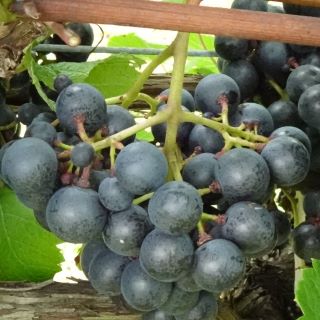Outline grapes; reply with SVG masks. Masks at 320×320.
<instances>
[{
  "label": "grapes",
  "instance_id": "obj_1",
  "mask_svg": "<svg viewBox=\"0 0 320 320\" xmlns=\"http://www.w3.org/2000/svg\"><path fill=\"white\" fill-rule=\"evenodd\" d=\"M218 73L204 77L194 98L181 91V112L228 124L271 139L263 150L220 152L225 140L213 127L178 122L176 142L183 160L200 154L174 181L162 153L167 122L152 125L154 139L135 134L115 149H99L103 170H90L89 187L65 185L53 146H71L75 166L91 163L87 136L101 128L106 138L134 125L129 111L106 105L91 84L64 74L50 108L36 86L32 103L19 107L24 138L0 149V179L31 208L37 222L57 238L83 243L81 269L100 294L118 296L134 309L150 311L141 320H216L218 294L242 283L247 258H260L289 240L291 221L262 204L274 185L305 195V222L294 228L293 248L301 258L320 259V47L215 35Z\"/></svg>",
  "mask_w": 320,
  "mask_h": 320
},
{
  "label": "grapes",
  "instance_id": "obj_2",
  "mask_svg": "<svg viewBox=\"0 0 320 320\" xmlns=\"http://www.w3.org/2000/svg\"><path fill=\"white\" fill-rule=\"evenodd\" d=\"M269 0H234L231 9L320 17V7L282 2L283 5L267 4Z\"/></svg>",
  "mask_w": 320,
  "mask_h": 320
},
{
  "label": "grapes",
  "instance_id": "obj_3",
  "mask_svg": "<svg viewBox=\"0 0 320 320\" xmlns=\"http://www.w3.org/2000/svg\"><path fill=\"white\" fill-rule=\"evenodd\" d=\"M65 26L75 31L81 38V43L78 46L92 45L94 36L90 23L66 22Z\"/></svg>",
  "mask_w": 320,
  "mask_h": 320
},
{
  "label": "grapes",
  "instance_id": "obj_4",
  "mask_svg": "<svg viewBox=\"0 0 320 320\" xmlns=\"http://www.w3.org/2000/svg\"><path fill=\"white\" fill-rule=\"evenodd\" d=\"M58 59L64 62H83L89 58V53H74V52H55Z\"/></svg>",
  "mask_w": 320,
  "mask_h": 320
},
{
  "label": "grapes",
  "instance_id": "obj_5",
  "mask_svg": "<svg viewBox=\"0 0 320 320\" xmlns=\"http://www.w3.org/2000/svg\"><path fill=\"white\" fill-rule=\"evenodd\" d=\"M15 120V114L7 107L0 108V127L8 126Z\"/></svg>",
  "mask_w": 320,
  "mask_h": 320
},
{
  "label": "grapes",
  "instance_id": "obj_6",
  "mask_svg": "<svg viewBox=\"0 0 320 320\" xmlns=\"http://www.w3.org/2000/svg\"><path fill=\"white\" fill-rule=\"evenodd\" d=\"M170 88L162 91L159 95L162 97L160 104L156 106V112L159 113L160 111L166 108L168 102V95H169Z\"/></svg>",
  "mask_w": 320,
  "mask_h": 320
},
{
  "label": "grapes",
  "instance_id": "obj_7",
  "mask_svg": "<svg viewBox=\"0 0 320 320\" xmlns=\"http://www.w3.org/2000/svg\"><path fill=\"white\" fill-rule=\"evenodd\" d=\"M38 44L66 45L57 34H54V37L48 36L44 41Z\"/></svg>",
  "mask_w": 320,
  "mask_h": 320
},
{
  "label": "grapes",
  "instance_id": "obj_8",
  "mask_svg": "<svg viewBox=\"0 0 320 320\" xmlns=\"http://www.w3.org/2000/svg\"><path fill=\"white\" fill-rule=\"evenodd\" d=\"M3 138H11L12 136H14L17 132V125L9 128V129H2L0 130Z\"/></svg>",
  "mask_w": 320,
  "mask_h": 320
}]
</instances>
